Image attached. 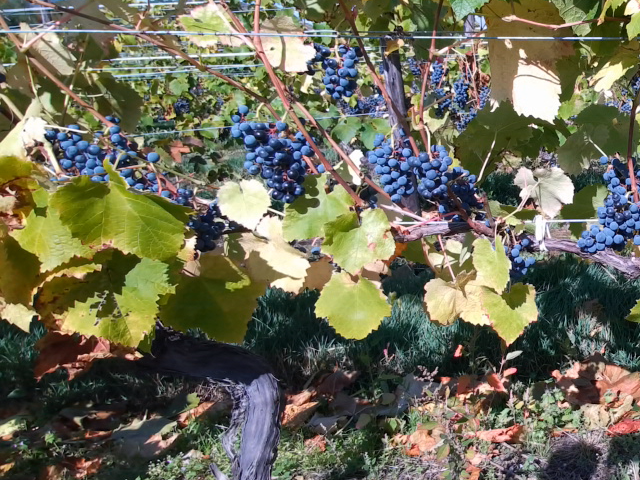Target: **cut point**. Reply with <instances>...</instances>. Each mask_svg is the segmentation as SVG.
Instances as JSON below:
<instances>
[{
	"label": "cut point",
	"mask_w": 640,
	"mask_h": 480,
	"mask_svg": "<svg viewBox=\"0 0 640 480\" xmlns=\"http://www.w3.org/2000/svg\"><path fill=\"white\" fill-rule=\"evenodd\" d=\"M399 125H401V123H400V122H397V123H395V124L391 127V130H390V139H391V142H394V137H393V136H394V133H393V132H394L395 128H397Z\"/></svg>",
	"instance_id": "1"
}]
</instances>
